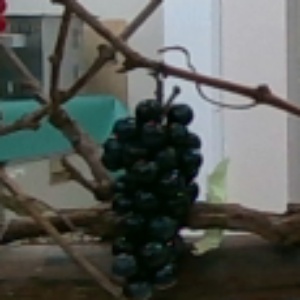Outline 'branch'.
<instances>
[{"label": "branch", "mask_w": 300, "mask_h": 300, "mask_svg": "<svg viewBox=\"0 0 300 300\" xmlns=\"http://www.w3.org/2000/svg\"><path fill=\"white\" fill-rule=\"evenodd\" d=\"M50 3L52 5H63L64 7L59 23V32L55 40L54 54L48 56V62L51 65L48 98L41 92L40 83L20 62L17 54L11 51L10 47L3 40H0V54L9 62L11 69L16 71L25 81L29 95L40 107L38 110L22 116L11 123L0 125V136H7L18 130H38L40 128V120L48 117V123L53 128L59 129L65 139L70 143L72 150L91 168V176L94 178L102 193L109 198H111L109 186L112 177L104 172L100 164L97 146L89 136L78 127L77 122L70 119L67 115V111L60 105L75 98L84 87L93 81L94 77L108 62L115 63L117 61V52L122 53L126 58L125 62L122 63L123 72L136 70L137 68H151L153 71L159 69L167 73L166 76L178 77L185 81L251 97L256 104H268L300 117V106L273 93L268 84H259L256 88H251L235 82L190 72L161 60L144 56L129 46V41L132 36L147 22L150 16L159 9L164 3V0H148L147 5L136 14L118 36L109 31L102 21L87 11L76 0H50ZM72 14L84 21L111 45L107 46L105 43H99L97 45L99 52L90 64V67L75 80L69 90L59 91L60 64L63 58L65 40L68 36V28Z\"/></svg>", "instance_id": "1"}, {"label": "branch", "mask_w": 300, "mask_h": 300, "mask_svg": "<svg viewBox=\"0 0 300 300\" xmlns=\"http://www.w3.org/2000/svg\"><path fill=\"white\" fill-rule=\"evenodd\" d=\"M0 184L7 188L13 197L20 204L22 209L34 220L39 227L55 241L60 249H62L68 257L80 266L98 285L105 291L114 296L117 300H128L123 289L107 280L104 275L96 269L86 258L80 255L70 242L63 237L60 231L51 225L47 219L36 209L34 204L19 189L13 179L0 167Z\"/></svg>", "instance_id": "2"}]
</instances>
